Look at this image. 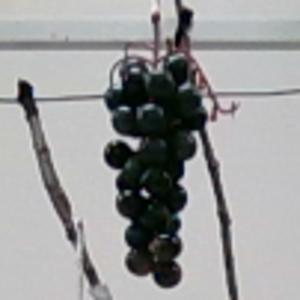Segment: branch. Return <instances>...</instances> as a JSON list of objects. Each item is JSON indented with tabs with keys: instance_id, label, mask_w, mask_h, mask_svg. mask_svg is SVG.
Instances as JSON below:
<instances>
[{
	"instance_id": "2",
	"label": "branch",
	"mask_w": 300,
	"mask_h": 300,
	"mask_svg": "<svg viewBox=\"0 0 300 300\" xmlns=\"http://www.w3.org/2000/svg\"><path fill=\"white\" fill-rule=\"evenodd\" d=\"M197 137L201 144L202 157L206 163L207 176L215 198V214L219 222L227 300H240L239 277L233 245V220L227 204L224 183L221 180L222 163L216 155L208 125L202 131L197 132Z\"/></svg>"
},
{
	"instance_id": "1",
	"label": "branch",
	"mask_w": 300,
	"mask_h": 300,
	"mask_svg": "<svg viewBox=\"0 0 300 300\" xmlns=\"http://www.w3.org/2000/svg\"><path fill=\"white\" fill-rule=\"evenodd\" d=\"M16 99L23 109L24 121L29 126L32 149L44 192L64 228V240L73 249L82 275L88 285L89 300H117L112 289L102 280L89 251L79 234L72 212V201L63 188L52 159V150L42 129L40 107L37 106L34 85L26 78L17 76Z\"/></svg>"
},
{
	"instance_id": "3",
	"label": "branch",
	"mask_w": 300,
	"mask_h": 300,
	"mask_svg": "<svg viewBox=\"0 0 300 300\" xmlns=\"http://www.w3.org/2000/svg\"><path fill=\"white\" fill-rule=\"evenodd\" d=\"M174 12L177 16V26L174 30V48H185L192 52L191 32L195 27V11L183 0H174Z\"/></svg>"
}]
</instances>
